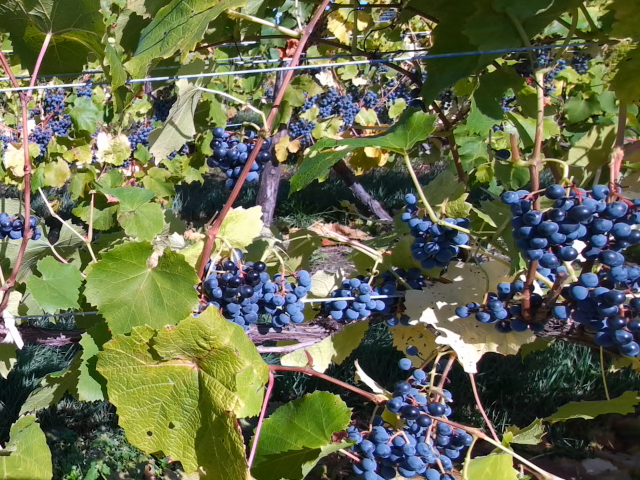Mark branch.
<instances>
[{
	"label": "branch",
	"instance_id": "branch-5",
	"mask_svg": "<svg viewBox=\"0 0 640 480\" xmlns=\"http://www.w3.org/2000/svg\"><path fill=\"white\" fill-rule=\"evenodd\" d=\"M429 419L433 420L435 422L449 424L450 426L456 427L458 429L470 431L474 435H476L482 443H486L487 442L489 445H493L495 447H498L500 450L507 451V452L511 453V454L508 455V458L511 459L514 463H517L519 466H522L525 469H528L529 471H535V472L540 473L546 480H558V478L552 472H550L547 468H545L543 465H540L539 463H536L535 461H532L531 459L527 458L526 456H523L519 451L514 450L513 448H511L509 446H505V445L501 444L500 442H497L495 440H491L488 436L483 435L475 427L464 425V424H460V423L455 422V421H453L451 419H446V418L438 417V416H435V415H430Z\"/></svg>",
	"mask_w": 640,
	"mask_h": 480
},
{
	"label": "branch",
	"instance_id": "branch-10",
	"mask_svg": "<svg viewBox=\"0 0 640 480\" xmlns=\"http://www.w3.org/2000/svg\"><path fill=\"white\" fill-rule=\"evenodd\" d=\"M0 60L3 64V66L5 67V70L7 71V74L12 82V84L17 87L20 85L19 79L17 78V75L7 57V55L5 54L4 50L2 48H0Z\"/></svg>",
	"mask_w": 640,
	"mask_h": 480
},
{
	"label": "branch",
	"instance_id": "branch-1",
	"mask_svg": "<svg viewBox=\"0 0 640 480\" xmlns=\"http://www.w3.org/2000/svg\"><path fill=\"white\" fill-rule=\"evenodd\" d=\"M293 76H294V73L292 71H288L286 73V75L284 76L282 82L280 83V87H279L278 93L276 95V98L274 100V104L269 109V111L267 112V114L265 115V118L263 120V123H262V126H261V128L263 129V133L262 134L257 133V135L255 136L253 149L251 150V153L247 157V160L245 161V164H244L243 168L241 169V173L239 174L238 179L232 185V187H231V189L229 191V194L225 197L224 205L220 208L221 212H220L217 220L210 227L208 239L203 244V253H202L201 257H199L197 259V274H196V277L198 279H202L204 277V267H205V264L207 262V259L210 257V246L215 242V238H212L211 234L212 233H217V230L220 228V226L225 221L228 212L232 209V204H233V200L235 199L236 193L238 192L239 188L243 185L244 181L246 180L248 172H249L254 160L256 159V157L258 155V152L260 151L262 138L268 132L269 125L271 123L272 117L278 111V109L281 107L282 100H283V98L285 96V92H286V89H287V85L289 84V82L293 78Z\"/></svg>",
	"mask_w": 640,
	"mask_h": 480
},
{
	"label": "branch",
	"instance_id": "branch-7",
	"mask_svg": "<svg viewBox=\"0 0 640 480\" xmlns=\"http://www.w3.org/2000/svg\"><path fill=\"white\" fill-rule=\"evenodd\" d=\"M348 247L358 253L364 254L365 256L372 258L373 260L379 259L380 260V264L381 266L387 271L388 274L394 276L395 278L399 279L402 283H404V285L407 287V290L409 292L413 291L412 288V284L401 274L397 273L396 271L392 270L388 264L386 263L385 260H383L381 257H379L378 255H375L374 253L369 252L368 250L364 249V248H360L355 244L349 243Z\"/></svg>",
	"mask_w": 640,
	"mask_h": 480
},
{
	"label": "branch",
	"instance_id": "branch-2",
	"mask_svg": "<svg viewBox=\"0 0 640 480\" xmlns=\"http://www.w3.org/2000/svg\"><path fill=\"white\" fill-rule=\"evenodd\" d=\"M18 95L21 97V102L19 104V120L21 124L22 130V154L24 155V194H25V214H24V223H23V231H22V242L19 245L18 252L16 254L15 265L10 271L7 277V283L3 288L2 295L0 297V311H3L7 304V299L9 297L10 291L13 288L14 280L18 272L22 268L23 257L26 251V248L29 244V234H30V226H31V216H32V192H31V144L29 141V127L26 118V107L28 105V95L25 91L18 92Z\"/></svg>",
	"mask_w": 640,
	"mask_h": 480
},
{
	"label": "branch",
	"instance_id": "branch-4",
	"mask_svg": "<svg viewBox=\"0 0 640 480\" xmlns=\"http://www.w3.org/2000/svg\"><path fill=\"white\" fill-rule=\"evenodd\" d=\"M268 371L270 373L276 372H303L323 379L326 382H329L334 385H339L345 388H349L352 390H356L363 397L373 400L377 403H384L386 401V396L377 391H373L367 388L360 381H356L353 379H349L343 376H338L333 373L328 372L320 367L314 366L312 364L307 363H272L268 366Z\"/></svg>",
	"mask_w": 640,
	"mask_h": 480
},
{
	"label": "branch",
	"instance_id": "branch-8",
	"mask_svg": "<svg viewBox=\"0 0 640 480\" xmlns=\"http://www.w3.org/2000/svg\"><path fill=\"white\" fill-rule=\"evenodd\" d=\"M536 272H537V263L535 261H532L530 263V269H529L527 283L525 287V293L522 298V316L525 320H528L530 318L529 300L532 296V289L535 281Z\"/></svg>",
	"mask_w": 640,
	"mask_h": 480
},
{
	"label": "branch",
	"instance_id": "branch-9",
	"mask_svg": "<svg viewBox=\"0 0 640 480\" xmlns=\"http://www.w3.org/2000/svg\"><path fill=\"white\" fill-rule=\"evenodd\" d=\"M508 18L511 20L515 36L523 45L531 44V38L525 33L520 16L515 9L508 11Z\"/></svg>",
	"mask_w": 640,
	"mask_h": 480
},
{
	"label": "branch",
	"instance_id": "branch-3",
	"mask_svg": "<svg viewBox=\"0 0 640 480\" xmlns=\"http://www.w3.org/2000/svg\"><path fill=\"white\" fill-rule=\"evenodd\" d=\"M527 57L530 62L532 73L535 75V90L538 96V106L535 109V127L533 132V147L530 152V194L531 205L536 210L541 209L540 188H539V170L541 164L537 163L542 151V137L544 131V104L542 92V76L547 74L542 72L538 54L535 49L527 50Z\"/></svg>",
	"mask_w": 640,
	"mask_h": 480
},
{
	"label": "branch",
	"instance_id": "branch-6",
	"mask_svg": "<svg viewBox=\"0 0 640 480\" xmlns=\"http://www.w3.org/2000/svg\"><path fill=\"white\" fill-rule=\"evenodd\" d=\"M331 2V0H322L315 8L314 13L311 17V20L309 21L306 29L304 30L303 34L301 35V38L299 39L298 43L296 44L293 53H292V59L290 61L291 65H295L298 64L299 61V55L303 49V46L305 45L306 41L308 40V37L310 36V34L312 33V31L314 30L319 17L321 16V12L322 10Z\"/></svg>",
	"mask_w": 640,
	"mask_h": 480
}]
</instances>
